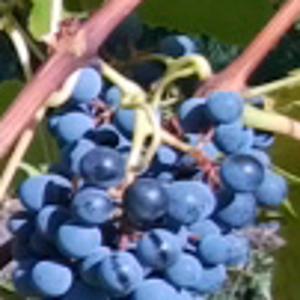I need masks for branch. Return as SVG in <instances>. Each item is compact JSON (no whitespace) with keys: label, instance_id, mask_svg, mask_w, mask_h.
<instances>
[{"label":"branch","instance_id":"obj_2","mask_svg":"<svg viewBox=\"0 0 300 300\" xmlns=\"http://www.w3.org/2000/svg\"><path fill=\"white\" fill-rule=\"evenodd\" d=\"M300 0H287L249 41L236 63H230L197 83L195 92L207 98L219 89L237 93L255 70L266 61L277 42L300 24Z\"/></svg>","mask_w":300,"mask_h":300},{"label":"branch","instance_id":"obj_1","mask_svg":"<svg viewBox=\"0 0 300 300\" xmlns=\"http://www.w3.org/2000/svg\"><path fill=\"white\" fill-rule=\"evenodd\" d=\"M143 0H105L84 18L72 34L44 56L33 71L34 79L15 96L0 116V158L8 156L35 110L60 91L75 70L95 63L100 43L113 34Z\"/></svg>","mask_w":300,"mask_h":300},{"label":"branch","instance_id":"obj_3","mask_svg":"<svg viewBox=\"0 0 300 300\" xmlns=\"http://www.w3.org/2000/svg\"><path fill=\"white\" fill-rule=\"evenodd\" d=\"M241 116L250 125L282 134L293 141H300V124L282 113L247 105L243 107Z\"/></svg>","mask_w":300,"mask_h":300}]
</instances>
